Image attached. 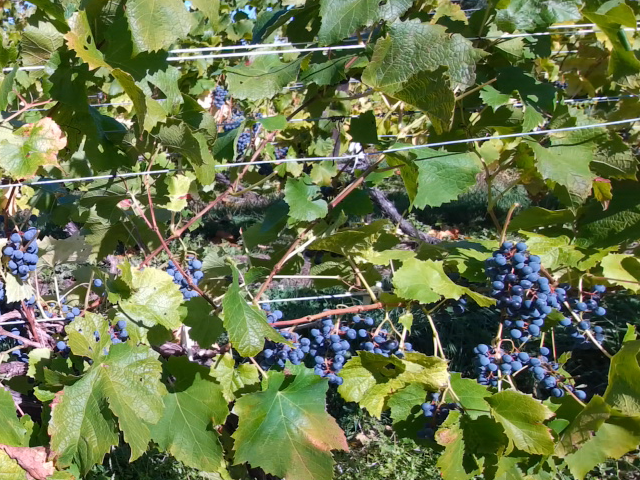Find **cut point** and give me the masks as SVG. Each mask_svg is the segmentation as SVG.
<instances>
[{"instance_id":"cut-point-2","label":"cut point","mask_w":640,"mask_h":480,"mask_svg":"<svg viewBox=\"0 0 640 480\" xmlns=\"http://www.w3.org/2000/svg\"><path fill=\"white\" fill-rule=\"evenodd\" d=\"M177 243L181 246L182 252L184 254L188 253L185 242L181 239V236L176 239Z\"/></svg>"},{"instance_id":"cut-point-3","label":"cut point","mask_w":640,"mask_h":480,"mask_svg":"<svg viewBox=\"0 0 640 480\" xmlns=\"http://www.w3.org/2000/svg\"><path fill=\"white\" fill-rule=\"evenodd\" d=\"M7 216H8V218L10 219V221L12 222V226H13L14 230H15L16 232H19V228H18V227H17V225L15 224V220H14V218L11 216L10 211H7Z\"/></svg>"},{"instance_id":"cut-point-1","label":"cut point","mask_w":640,"mask_h":480,"mask_svg":"<svg viewBox=\"0 0 640 480\" xmlns=\"http://www.w3.org/2000/svg\"><path fill=\"white\" fill-rule=\"evenodd\" d=\"M384 310H385L384 318L376 324V327L378 329H382L385 326H387L390 330H395L397 328V325L391 321L392 307L390 305H386L384 307Z\"/></svg>"}]
</instances>
